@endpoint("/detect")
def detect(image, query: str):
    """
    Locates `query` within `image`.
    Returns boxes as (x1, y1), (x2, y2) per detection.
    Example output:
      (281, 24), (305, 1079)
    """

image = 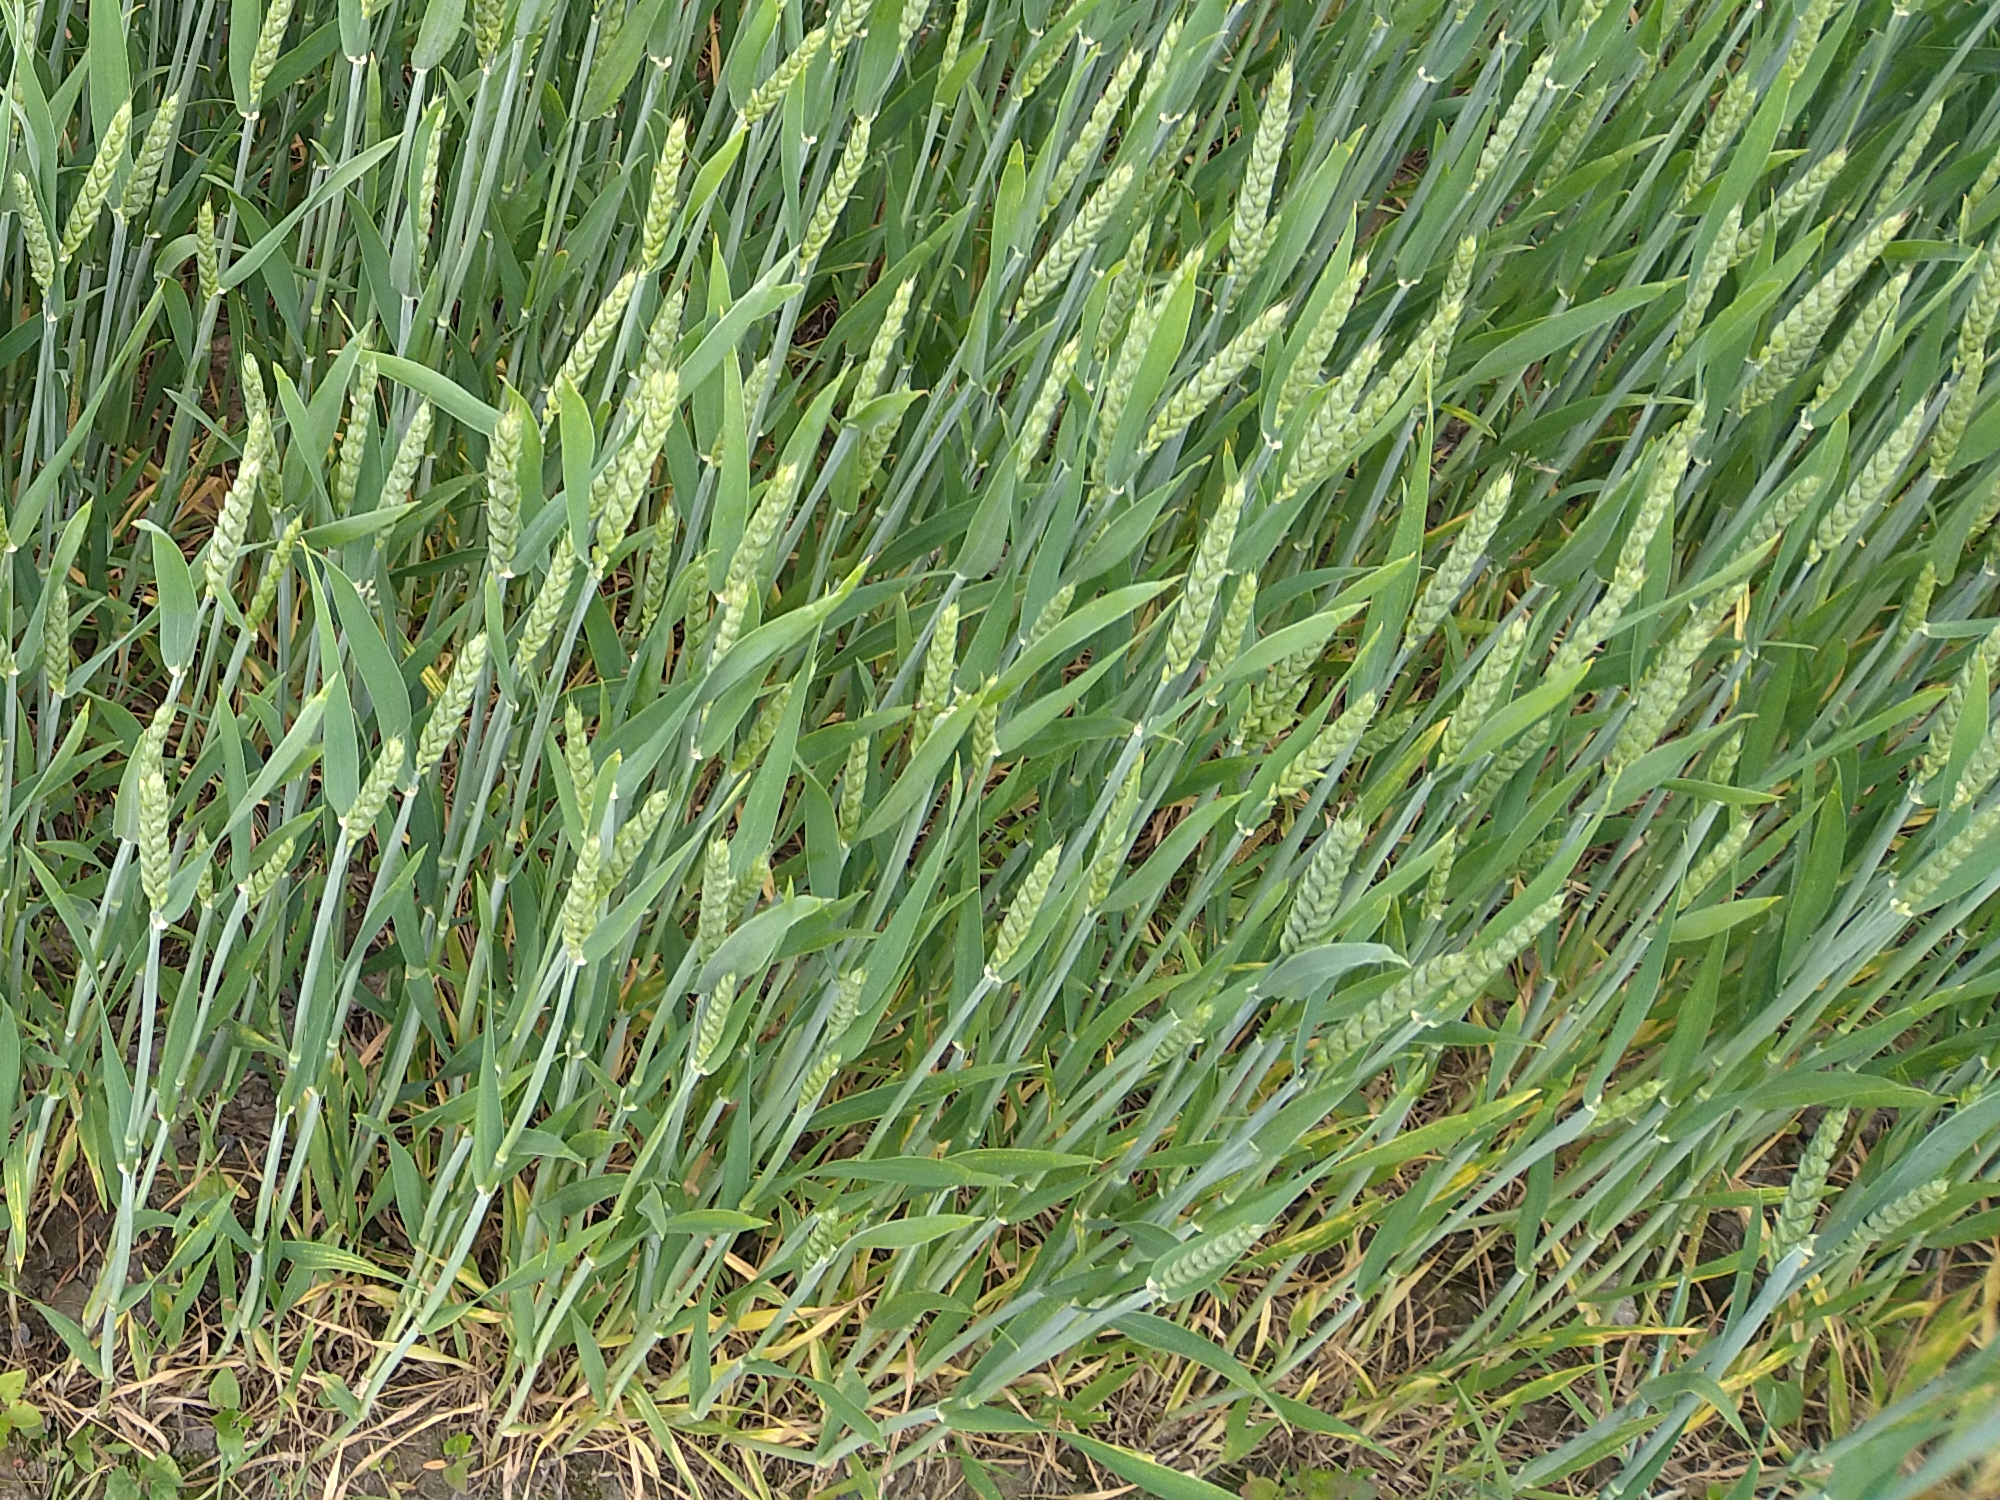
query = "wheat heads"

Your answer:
(1712, 734), (1740, 781)
(1097, 299), (1152, 485)
(1622, 56), (1654, 114)
(1314, 313), (1444, 475)
(1665, 206), (1743, 359)
(699, 838), (732, 963)
(587, 385), (647, 520)
(839, 712), (872, 836)
(1282, 821), (1367, 956)
(417, 635), (486, 771)
(1535, 83), (1604, 195)
(900, 0), (958, 58)
(640, 502), (677, 628)
(1709, 477), (1823, 597)
(1951, 717), (2000, 808)
(209, 416), (264, 576)
(1896, 560), (1936, 651)
(562, 835), (603, 956)
(1663, 818), (1755, 919)
(1207, 576), (1257, 675)
(1419, 831), (1457, 914)
(859, 411), (903, 489)
(1549, 576), (1648, 677)
(1739, 153), (1848, 245)
(695, 974), (735, 1065)
(472, 0), (517, 66)
(585, 0), (624, 81)
(1781, 0), (1833, 79)
(1966, 460), (2000, 534)
(241, 352), (284, 515)
(489, 421), (520, 577)
(1591, 1083), (1662, 1125)
(735, 28), (822, 124)
(347, 741), (406, 833)
(513, 533), (576, 670)
(1302, 948), (1471, 1064)
(376, 402), (431, 535)
(986, 848), (1061, 976)
(1033, 56), (1141, 227)
(1866, 99), (1945, 222)
(10, 170), (55, 288)
(740, 668), (813, 759)
(401, 98), (446, 264)
(543, 270), (636, 438)
(1148, 252), (1203, 337)
(1447, 620), (1525, 759)
(850, 278), (914, 422)
(799, 1051), (840, 1097)
(1224, 215), (1281, 302)
(1641, 585), (1737, 685)
(1242, 679), (1308, 752)
(1604, 671), (1687, 768)
(632, 288), (685, 405)
(564, 707), (599, 835)
(68, 102), (134, 252)
(192, 829), (213, 900)
(1348, 711), (1417, 763)
(936, 0), (968, 90)
(1817, 273), (1911, 403)
(251, 0), (298, 107)
(1091, 229), (1150, 347)
(1845, 1180), (1947, 1249)
(140, 707), (172, 774)
(0, 591), (16, 679)
(1145, 1008), (1214, 1060)
(195, 198), (223, 289)
(1084, 771), (1141, 898)
(1785, 1106), (1850, 1248)
(44, 583), (69, 697)
(1470, 41), (1552, 190)
(829, 0), (918, 48)
(794, 123), (871, 282)
(726, 860), (770, 927)
(251, 519), (303, 626)
(1165, 480), (1246, 675)
(1810, 401), (1932, 561)
(1471, 718), (1552, 798)
(1275, 694), (1380, 795)
(1135, 19), (1181, 134)
(1900, 617), (2000, 779)
(636, 116), (685, 262)
(1727, 89), (1759, 142)
(1619, 411), (1704, 584)
(603, 794), (668, 892)
(1739, 213), (1906, 411)
(339, 360), (380, 518)
(1125, 116), (1198, 221)
(1029, 585), (1072, 645)
(0, 499), (11, 560)
(251, 838), (293, 894)
(803, 1205), (838, 1268)
(713, 359), (772, 465)
(1681, 74), (1746, 203)
(973, 679), (1001, 772)
(10, 5), (41, 154)
(996, 0), (1094, 97)
(1276, 256), (1364, 437)
(1923, 351), (1986, 476)
(720, 585), (751, 664)
(1954, 231), (2000, 377)
(1013, 340), (1076, 473)
(600, 379), (685, 547)
(124, 96), (179, 216)
(1425, 236), (1476, 397)
(1900, 808), (2000, 899)
(910, 604), (958, 753)
(1403, 475), (1516, 647)
(686, 557), (708, 670)
(1438, 896), (1567, 1004)
(137, 773), (171, 908)
(727, 465), (797, 588)
(1652, 0), (1745, 45)
(1227, 63), (1292, 252)
(526, 0), (559, 72)
(829, 973), (863, 1032)
(1017, 170), (1133, 315)
(1237, 631), (1328, 726)
(1276, 337), (1379, 501)
(1139, 309), (1289, 450)
(1960, 154), (2000, 216)
(1162, 1225), (1267, 1291)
